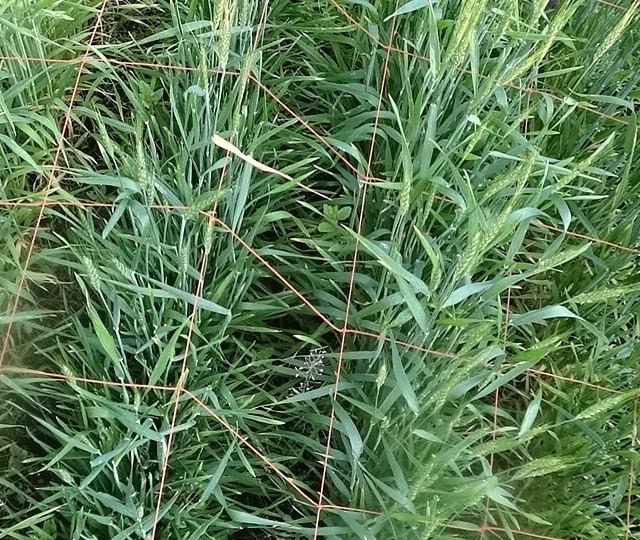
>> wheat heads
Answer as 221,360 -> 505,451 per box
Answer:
83,254 -> 100,288
408,466 -> 429,498
464,129 -> 485,157
429,269 -> 441,288
184,192 -> 223,217
493,5 -> 516,43
522,426 -> 544,441
470,440 -> 503,456
179,247 -> 190,272
467,429 -> 489,440
145,179 -> 154,204
109,257 -> 130,279
451,336 -> 482,359
480,213 -> 508,248
436,386 -> 449,407
443,13 -> 470,61
77,208 -> 89,235
539,14 -> 564,54
530,335 -> 558,348
597,17 -> 631,54
218,21 -> 232,69
420,524 -> 434,538
458,233 -> 479,270
500,59 -> 528,85
570,285 -> 624,306
135,152 -> 145,185
573,394 -> 618,416
506,107 -> 534,134
517,164 -> 535,195
484,166 -> 517,196
398,169 -> 410,208
199,54 -> 211,88
375,363 -> 387,382
515,457 -> 558,479
461,320 -> 486,345
436,367 -> 454,382
232,108 -> 242,128
464,352 -> 489,376
60,366 -> 76,386
455,0 -> 477,33
472,74 -> 493,105
94,124 -> 112,152
420,188 -> 439,218
541,251 -> 574,270
554,171 -> 577,189
205,223 -> 213,249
